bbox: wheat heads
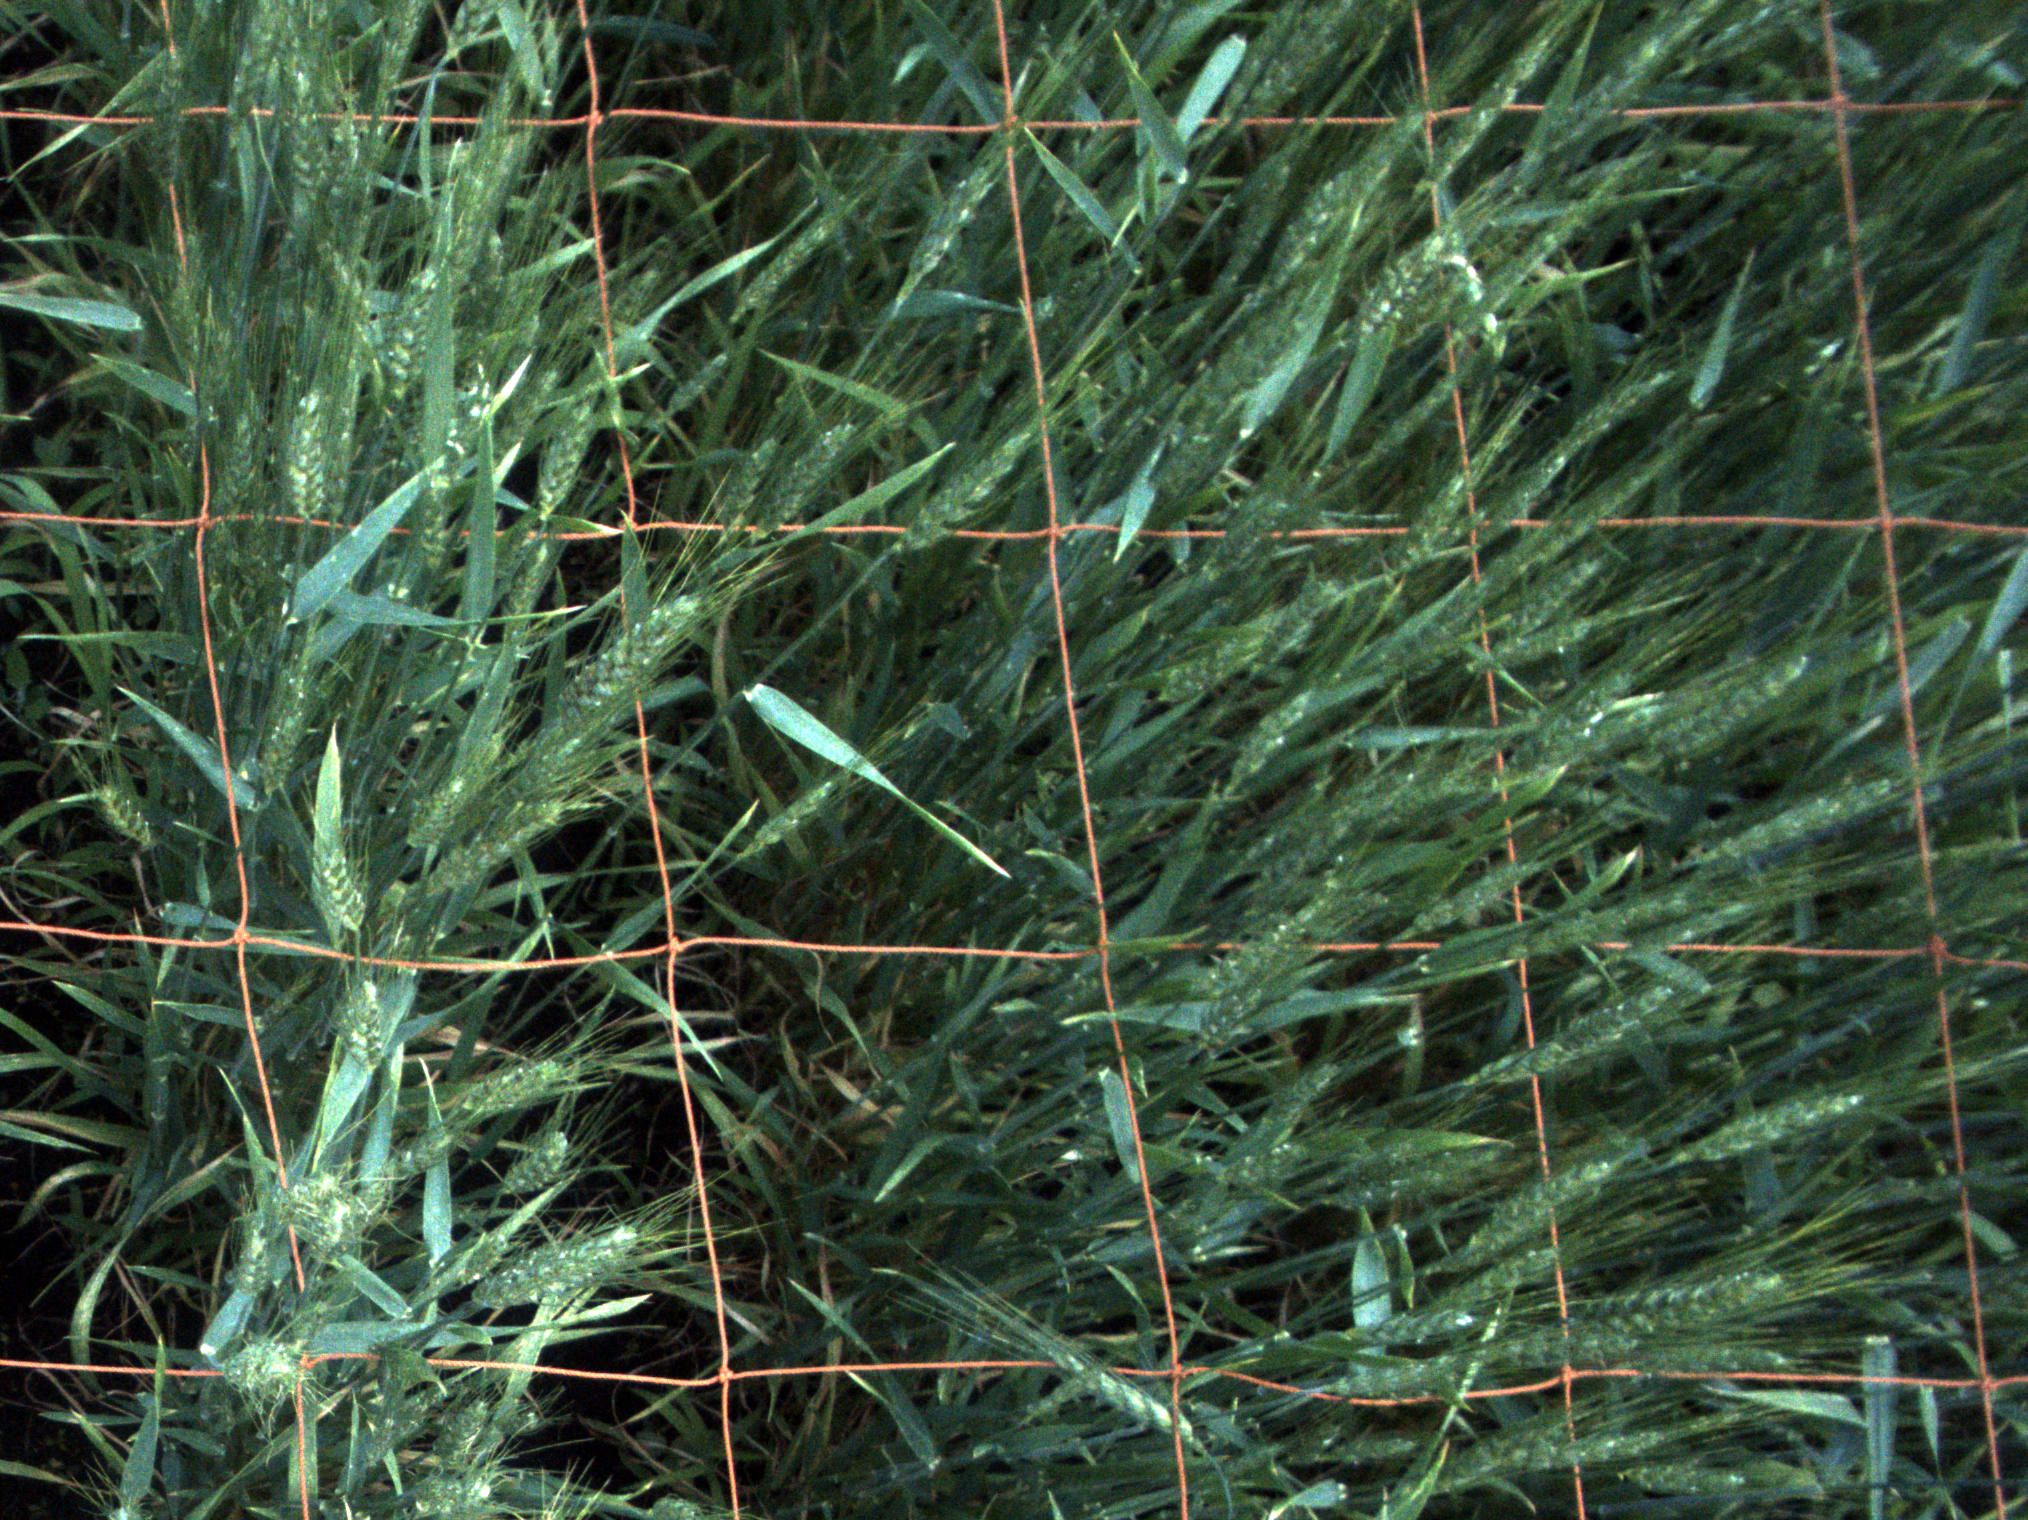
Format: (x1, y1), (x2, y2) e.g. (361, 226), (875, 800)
(1457, 227), (1565, 330)
(911, 162), (995, 286)
(1531, 30), (1663, 158)
(372, 1123), (460, 1187)
(1683, 772), (1890, 865)
(1640, 951), (1716, 997)
(1227, 683), (1316, 785)
(1383, 575), (1488, 682)
(473, 1220), (641, 1313)
(1362, 372), (1459, 454)
(1334, 1353), (1455, 1407)
(549, 582), (696, 728)
(284, 69), (332, 197)
(887, 427), (1032, 557)
(454, 1059), (566, 1114)
(1237, 826), (1294, 869)
(1625, 896), (1768, 962)
(261, 970), (312, 1025)
(224, 1), (295, 124)
(167, 284), (202, 365)
(1524, 381), (1652, 498)
(310, 1195), (358, 1259)
(730, 215), (842, 317)
(1165, 252), (1344, 438)
(403, 1474), (493, 1520)
(1238, 3), (1363, 118)
(1410, 26), (1554, 194)
(443, 361), (495, 469)
(1322, 1438), (1413, 1465)
(1233, 149), (1295, 268)
(153, 45), (188, 182)
(326, 122), (356, 217)
(1629, 1342), (1789, 1373)
(500, 1125), (570, 1198)
(420, 814), (557, 902)
(732, 778), (840, 860)
(1504, 556), (1599, 628)
(405, 783), (460, 857)
(1692, 0), (1821, 59)
(434, 1231), (502, 1286)
(202, 323), (237, 407)
(1036, 246), (1110, 350)
(312, 241), (385, 325)
(714, 434), (778, 529)
(326, 387), (354, 522)
(1213, 3), (1308, 127)
(206, 522), (241, 586)
(257, 712), (306, 791)
(1453, 1245), (1559, 1302)
(1466, 980), (1674, 1086)
(1156, 642), (1255, 687)
(1658, 1085), (1868, 1169)
(283, 1171), (339, 1233)
(1517, 668), (1632, 761)
(666, 350), (730, 420)
(246, 520), (275, 581)
(607, 269), (653, 324)
(1261, 807), (1347, 887)
(655, 1494), (700, 1520)
(224, 1332), (308, 1396)
(98, 774), (160, 846)
(1224, 1139), (1312, 1188)
(760, 421), (851, 537)
(345, 977), (390, 1061)
(1614, 1463), (1758, 1498)
(1640, 648), (1806, 759)
(1482, 896), (1691, 962)
(1395, 434), (1499, 571)
(319, 842), (368, 931)
(1044, 1353), (1194, 1448)
(1261, 576), (1327, 662)
(434, 1396), (487, 1469)
(537, 398), (597, 520)
(286, 387), (330, 520)
(363, 0), (425, 109)
(1439, 1408), (1577, 1483)
(233, 1218), (272, 1295)
(1433, 1160), (1614, 1278)
(1499, 465), (1658, 586)
(1358, 772), (1460, 820)
(495, 368), (562, 454)
(504, 538), (548, 632)
(648, 1488), (778, 1520)
(1214, 1438), (1281, 1486)
(1824, 882), (1932, 944)
(385, 261), (440, 398)
(1329, 1148), (1499, 1207)
(217, 412), (257, 511)
(1396, 859), (1538, 940)
(449, 114), (507, 283)
(1251, 1063), (1334, 1141)
(506, 738), (582, 805)
(1939, 1251), (2028, 1319)
(1268, 167), (1370, 290)
(1199, 489), (1289, 578)
(1342, 231), (1451, 339)
(443, 0), (507, 45)
(1359, 118), (1414, 175)
(1535, 1269), (1789, 1331)
(1512, 619), (1592, 659)
(1495, 1315), (1658, 1359)
(1194, 889), (1324, 1058)
(416, 491), (451, 555)
(1330, 1307), (1472, 1351)
(1510, 1428), (1667, 1472)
